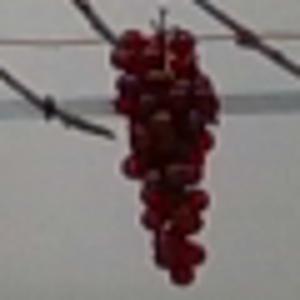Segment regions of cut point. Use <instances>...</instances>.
<instances>
[{"instance_id":"obj_1","label":"cut point","mask_w":300,"mask_h":300,"mask_svg":"<svg viewBox=\"0 0 300 300\" xmlns=\"http://www.w3.org/2000/svg\"><path fill=\"white\" fill-rule=\"evenodd\" d=\"M156 10L159 17L158 31L167 30L166 16L170 15L172 10L169 0H158Z\"/></svg>"}]
</instances>
